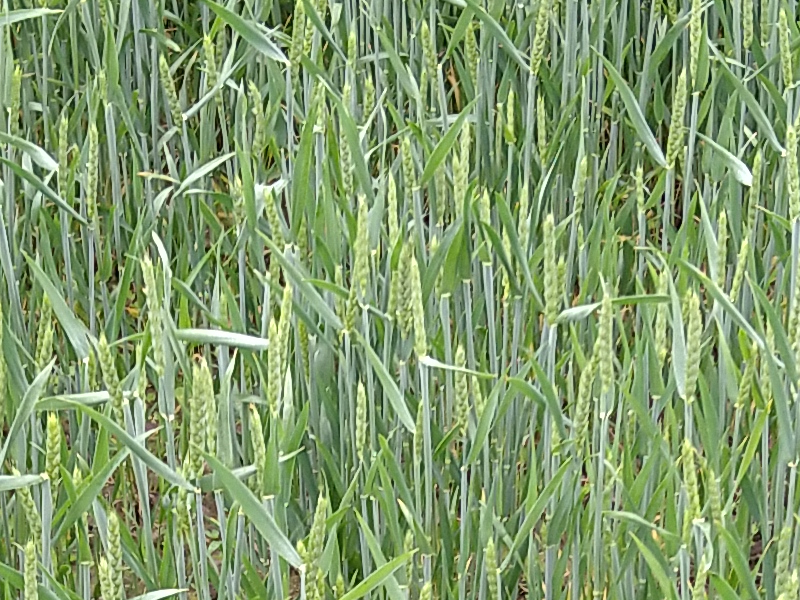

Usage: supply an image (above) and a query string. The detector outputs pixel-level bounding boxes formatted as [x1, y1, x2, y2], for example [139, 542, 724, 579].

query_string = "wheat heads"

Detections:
[175, 461, 189, 524]
[774, 526, 791, 592]
[3, 21, 8, 53]
[665, 70, 687, 168]
[481, 189, 491, 248]
[298, 318, 312, 376]
[690, 0, 703, 90]
[682, 286, 691, 325]
[431, 236, 437, 255]
[759, 324, 775, 402]
[709, 471, 719, 523]
[551, 414, 560, 446]
[40, 327, 53, 373]
[298, 541, 325, 600]
[234, 177, 243, 225]
[450, 153, 463, 213]
[402, 530, 414, 576]
[58, 116, 68, 199]
[157, 54, 183, 130]
[339, 124, 354, 196]
[666, 0, 677, 22]
[251, 408, 263, 483]
[334, 264, 345, 316]
[141, 259, 167, 379]
[46, 411, 61, 487]
[794, 83, 800, 142]
[558, 257, 564, 300]
[342, 83, 353, 110]
[681, 440, 700, 515]
[299, 216, 308, 262]
[571, 363, 592, 447]
[629, 409, 637, 446]
[471, 377, 486, 421]
[217, 30, 226, 65]
[790, 245, 800, 342]
[279, 285, 293, 369]
[412, 258, 428, 358]
[538, 92, 546, 158]
[353, 195, 367, 295]
[74, 469, 87, 541]
[268, 315, 280, 415]
[745, 0, 752, 49]
[10, 467, 43, 545]
[307, 497, 322, 600]
[197, 353, 219, 450]
[35, 289, 49, 360]
[678, 150, 686, 178]
[717, 208, 727, 285]
[590, 338, 601, 379]
[0, 295, 4, 385]
[503, 225, 512, 304]
[250, 81, 265, 152]
[11, 69, 21, 134]
[303, 0, 317, 57]
[436, 159, 446, 222]
[785, 125, 800, 218]
[529, 0, 552, 77]
[346, 260, 359, 330]
[486, 0, 494, 11]
[201, 36, 224, 107]
[347, 32, 357, 78]
[420, 20, 439, 84]
[776, 6, 793, 85]
[400, 136, 415, 209]
[387, 271, 399, 319]
[85, 351, 96, 387]
[749, 151, 761, 228]
[654, 270, 670, 355]
[484, 537, 498, 600]
[462, 117, 471, 183]
[86, 125, 99, 219]
[188, 361, 204, 477]
[737, 345, 759, 411]
[23, 538, 43, 600]
[455, 345, 467, 432]
[355, 383, 366, 455]
[542, 215, 557, 325]
[795, 280, 800, 382]
[335, 572, 346, 598]
[139, 369, 146, 399]
[773, 569, 800, 600]
[94, 0, 108, 22]
[106, 512, 123, 599]
[689, 557, 709, 600]
[572, 157, 587, 224]
[268, 253, 280, 310]
[598, 295, 613, 397]
[388, 171, 399, 247]
[99, 332, 126, 426]
[0, 360, 9, 426]
[518, 187, 529, 247]
[410, 580, 431, 600]
[465, 23, 479, 83]
[508, 87, 514, 135]
[261, 186, 284, 252]
[397, 242, 410, 331]
[287, 0, 303, 83]
[318, 0, 329, 23]
[637, 164, 645, 209]
[685, 292, 702, 399]
[413, 396, 426, 464]
[420, 71, 428, 107]
[553, 0, 559, 11]
[561, 0, 570, 27]
[730, 239, 747, 303]
[363, 79, 375, 124]
[96, 559, 118, 600]
[760, 0, 770, 46]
